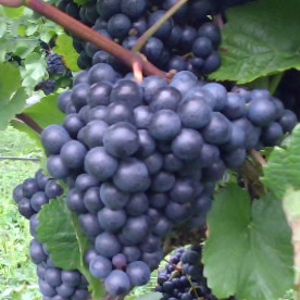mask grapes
Masks as SVG:
<instances>
[{
    "label": "grapes",
    "mask_w": 300,
    "mask_h": 300,
    "mask_svg": "<svg viewBox=\"0 0 300 300\" xmlns=\"http://www.w3.org/2000/svg\"><path fill=\"white\" fill-rule=\"evenodd\" d=\"M58 108L66 119L44 127L39 144L94 244L89 273L109 295L147 284L173 225H204L217 179L298 124L266 88L229 91L189 70L139 84L108 63L80 71Z\"/></svg>",
    "instance_id": "obj_1"
}]
</instances>
